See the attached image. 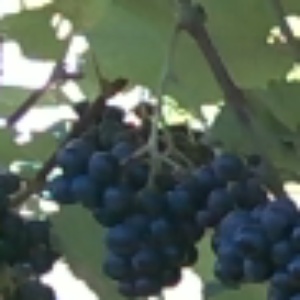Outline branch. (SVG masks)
Wrapping results in <instances>:
<instances>
[{"label": "branch", "mask_w": 300, "mask_h": 300, "mask_svg": "<svg viewBox=\"0 0 300 300\" xmlns=\"http://www.w3.org/2000/svg\"><path fill=\"white\" fill-rule=\"evenodd\" d=\"M172 8L174 14L181 17L183 29L186 30L191 38L201 47L225 97L230 101L239 100L241 92L236 88L230 78V74L218 49L212 38L206 32L204 12L199 6L191 5L190 0H172Z\"/></svg>", "instance_id": "1"}]
</instances>
